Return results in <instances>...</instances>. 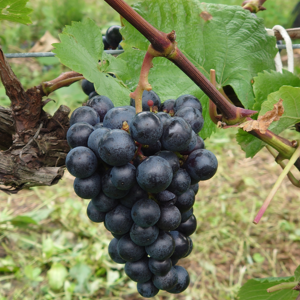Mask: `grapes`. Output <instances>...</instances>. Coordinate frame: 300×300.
<instances>
[{"instance_id": "1", "label": "grapes", "mask_w": 300, "mask_h": 300, "mask_svg": "<svg viewBox=\"0 0 300 300\" xmlns=\"http://www.w3.org/2000/svg\"><path fill=\"white\" fill-rule=\"evenodd\" d=\"M69 125L65 166L76 195L91 199L88 218L104 222L114 237L111 260L125 264L145 298L185 291L190 277L176 264L193 250L198 183L218 168L198 135L204 127L199 99L183 94L161 105L154 90H144L136 114L135 99L114 107L96 95L71 113Z\"/></svg>"}]
</instances>
